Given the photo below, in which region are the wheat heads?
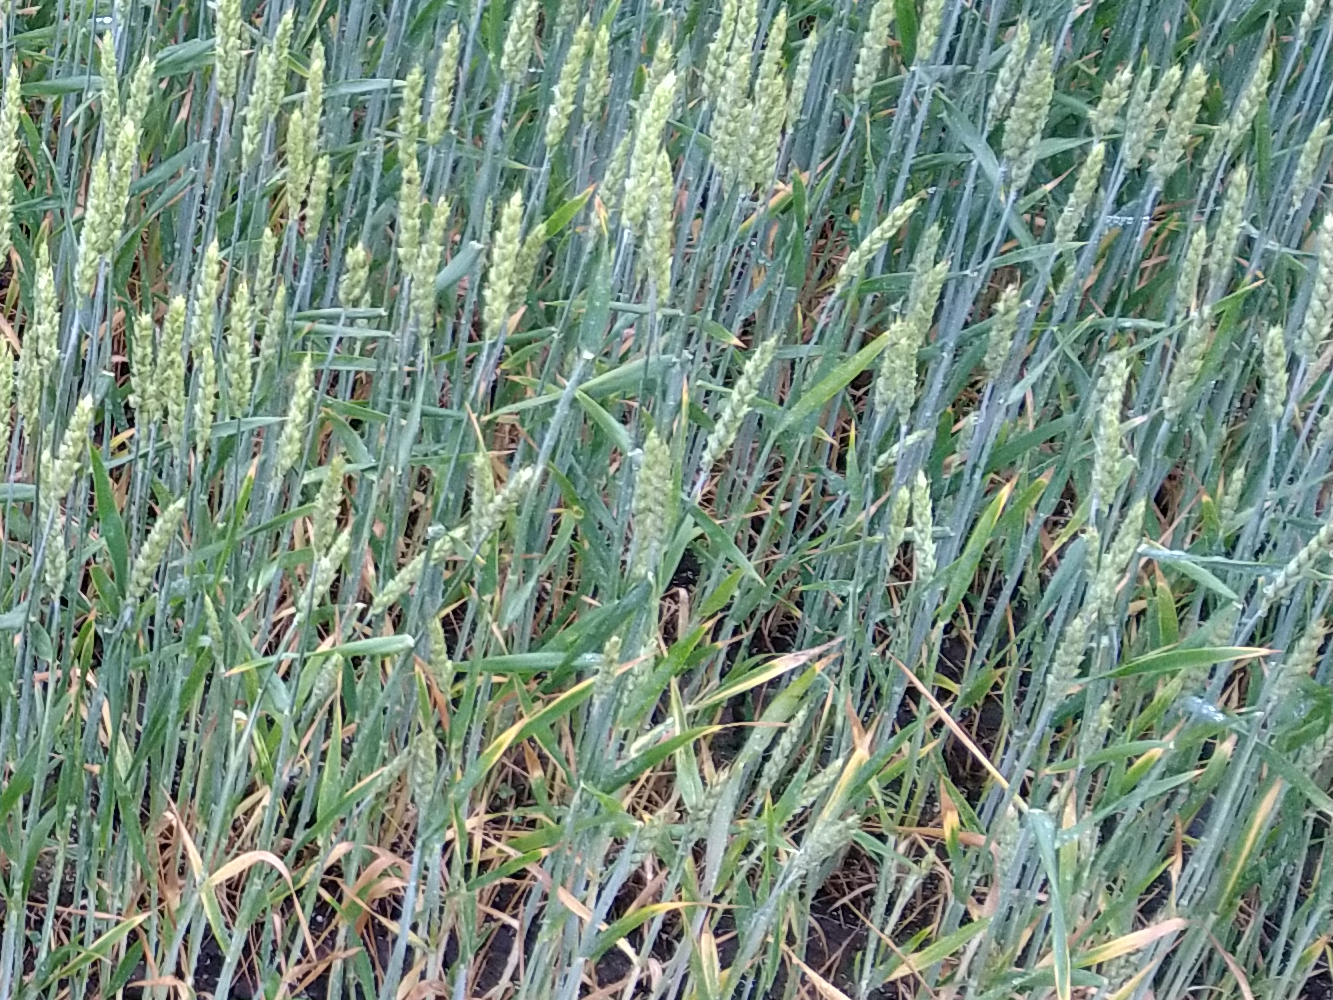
[707,54,751,134]
[676,774,726,865]
[401,66,426,184]
[649,444,670,541]
[1091,71,1130,127]
[730,0,759,65]
[596,635,619,714]
[37,477,64,593]
[650,149,671,304]
[995,810,1017,868]
[1005,47,1048,158]
[1300,219,1333,354]
[703,338,775,469]
[1169,231,1207,316]
[509,227,548,316]
[910,469,930,590]
[194,348,213,464]
[396,182,426,278]
[621,639,657,704]
[432,619,449,690]
[1082,357,1113,418]
[700,4,737,108]
[367,525,464,614]
[1,63,19,141]
[1219,470,1245,531]
[414,728,430,808]
[558,0,577,29]
[1164,324,1207,421]
[1263,326,1289,417]
[737,77,781,189]
[1207,163,1248,304]
[852,0,895,97]
[204,595,222,659]
[761,8,788,93]
[252,227,274,309]
[910,228,941,312]
[211,0,239,104]
[1258,525,1332,600]
[1097,363,1129,504]
[718,68,753,158]
[190,239,217,343]
[1287,119,1327,215]
[753,706,811,795]
[131,315,156,426]
[874,316,907,410]
[726,105,761,194]
[1045,621,1090,709]
[917,0,959,61]
[64,398,97,487]
[245,55,268,158]
[1295,723,1333,767]
[415,197,450,337]
[40,427,54,485]
[20,332,41,434]
[36,244,56,383]
[1201,124,1224,177]
[623,79,679,232]
[1127,65,1151,135]
[630,816,665,864]
[913,266,948,342]
[123,57,153,139]
[782,761,842,820]
[1300,0,1333,40]
[1230,48,1272,151]
[986,23,1030,132]
[304,47,325,164]
[99,37,120,146]
[1183,619,1236,689]
[591,136,628,232]
[987,285,1021,373]
[125,503,186,622]
[0,136,22,270]
[73,152,108,295]
[288,110,308,217]
[154,295,187,400]
[310,656,340,701]
[228,284,250,409]
[635,34,673,118]
[307,458,344,552]
[169,356,182,466]
[755,95,790,183]
[898,320,917,410]
[835,191,931,285]
[258,288,285,356]
[1011,81,1054,187]
[543,15,590,145]
[792,28,820,128]
[880,488,909,573]
[1264,616,1326,710]
[1086,504,1146,609]
[0,354,12,476]
[635,430,659,523]
[484,193,523,321]
[265,13,294,117]
[1156,64,1210,171]
[1055,144,1105,236]
[336,249,368,306]
[308,158,331,243]
[297,529,355,620]
[102,111,133,250]
[1083,705,1109,754]
[1086,529,1100,583]
[499,0,550,78]
[804,818,857,863]
[279,352,307,477]
[432,27,465,135]
[588,28,610,113]
[482,474,536,528]
[471,457,492,551]
[1125,71,1184,161]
